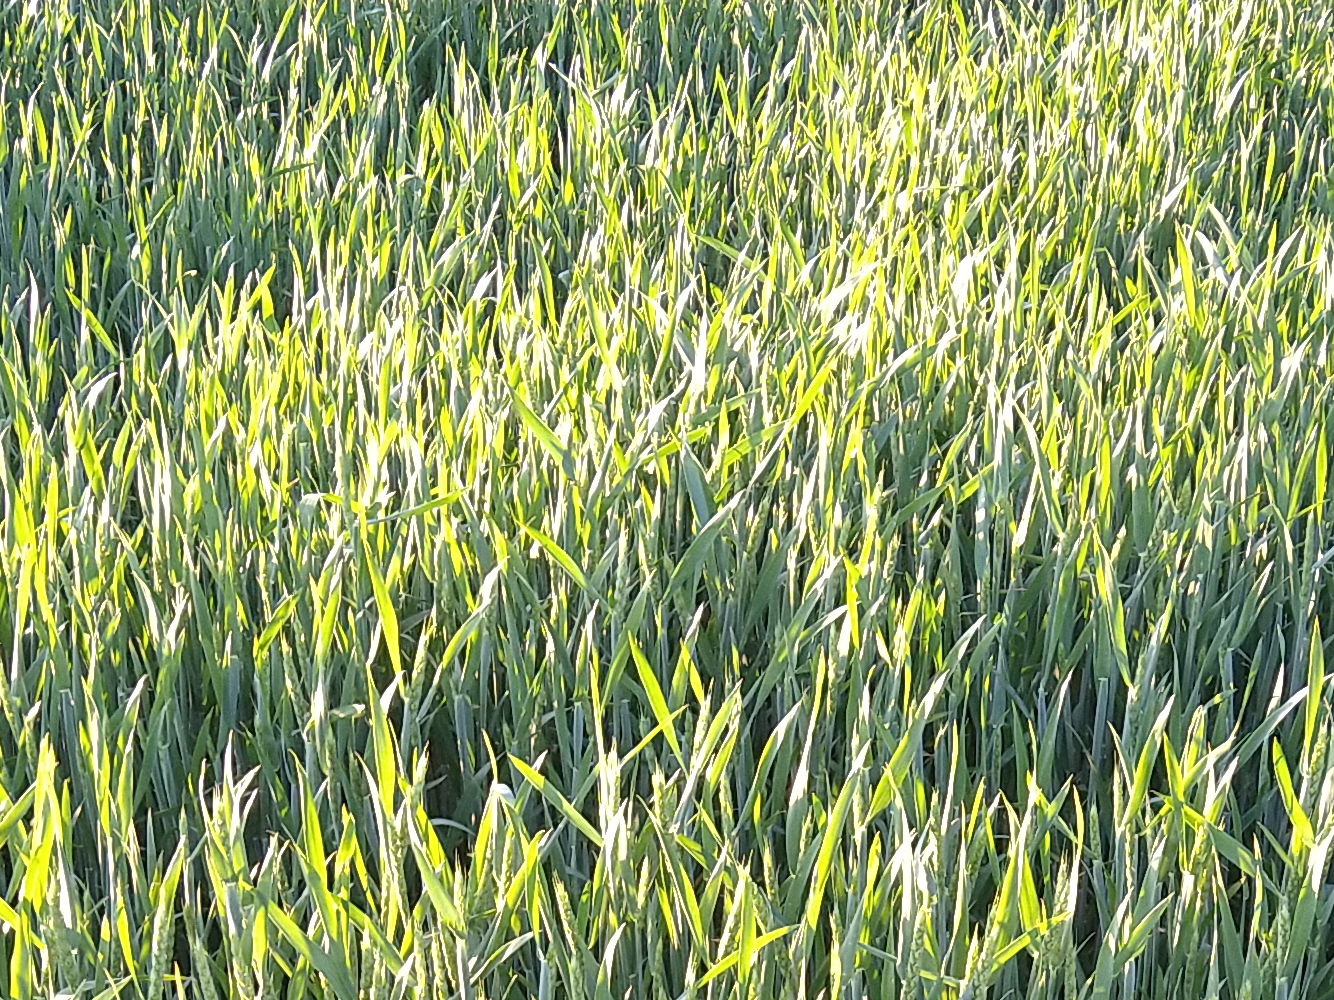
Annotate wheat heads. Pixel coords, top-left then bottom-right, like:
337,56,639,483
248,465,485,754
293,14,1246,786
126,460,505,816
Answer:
179,815,192,870
1247,209,1256,246
452,864,467,915
40,232,49,268
684,975,697,1000
1090,806,1100,857
746,497,770,556
340,476,354,529
948,872,956,892
261,651,269,711
1039,864,1067,958
487,353,498,401
292,618,308,672
260,976,288,1000
1103,402,1110,426
779,476,789,517
56,557,72,599
720,890,744,950
1157,581,1164,617
583,694,594,734
1078,402,1087,450
610,534,627,614
647,558,659,605
987,901,1000,932
229,466,235,499
833,907,844,945
878,540,898,623
197,943,226,1000
486,587,497,635
410,636,429,720
183,904,197,937
951,573,960,624
829,965,845,1000
436,544,443,596
1284,865,1301,905
762,368,774,411
348,931,358,992
24,727,43,773
829,632,839,717
774,624,783,647
830,546,843,596
748,874,769,925
991,726,1001,787
524,354,539,412
1315,840,1334,897
905,909,926,1000
853,778,863,821
533,690,547,735
789,549,800,607
833,439,843,479
756,326,766,351
980,568,991,613
1183,932,1198,995
142,910,166,1000
47,872,61,910
784,673,792,712
721,769,736,831
75,747,87,794
1143,807,1156,857
684,707,693,751
609,771,619,812
870,472,884,531
1198,863,1212,910
1258,951,1278,983
443,576,454,637
990,850,1000,881
1197,646,1206,668
971,936,996,1000
324,739,339,811
360,940,372,1000
748,550,757,586
706,437,730,491
414,926,429,1000
964,924,983,985
236,441,246,483
1058,433,1072,481
818,754,826,796
1058,641,1065,667
1126,821,1135,885
802,691,812,714
1300,514,1313,606
259,556,270,590
51,901,80,992
0,539,14,583
0,670,15,728
431,939,451,1000
1012,537,1020,573
735,464,746,493
451,140,459,174
543,942,558,985
1327,478,1334,523
653,772,669,828
503,721,514,749
369,967,381,1000
165,914,174,974
764,846,775,901
1060,513,1078,559
97,528,109,561
509,316,522,358
1140,499,1168,574
1195,824,1208,861
280,635,308,729
690,698,713,776
215,800,236,864
1178,480,1190,517
1276,905,1294,961
777,938,797,983
971,374,986,415
558,312,572,349
573,948,586,970
349,755,364,813
995,494,1005,555
352,638,367,682
1308,721,1334,806
275,858,291,905
666,463,678,522
639,857,650,904
729,698,741,730
567,959,592,1000
838,517,852,549
932,787,942,886
1129,655,1148,743
741,396,754,438
322,976,347,1000
807,505,821,552
39,922,56,986
150,555,166,587
444,930,460,976
386,817,409,910
1064,940,1077,1000
905,403,912,436
1114,782,1123,832
747,974,762,1000
110,927,123,979
1217,643,1226,670
639,716,656,766
232,944,260,1000
967,828,987,882
559,888,580,944
674,587,690,633
1324,815,1333,839
473,845,493,914
501,832,513,900
410,754,429,815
